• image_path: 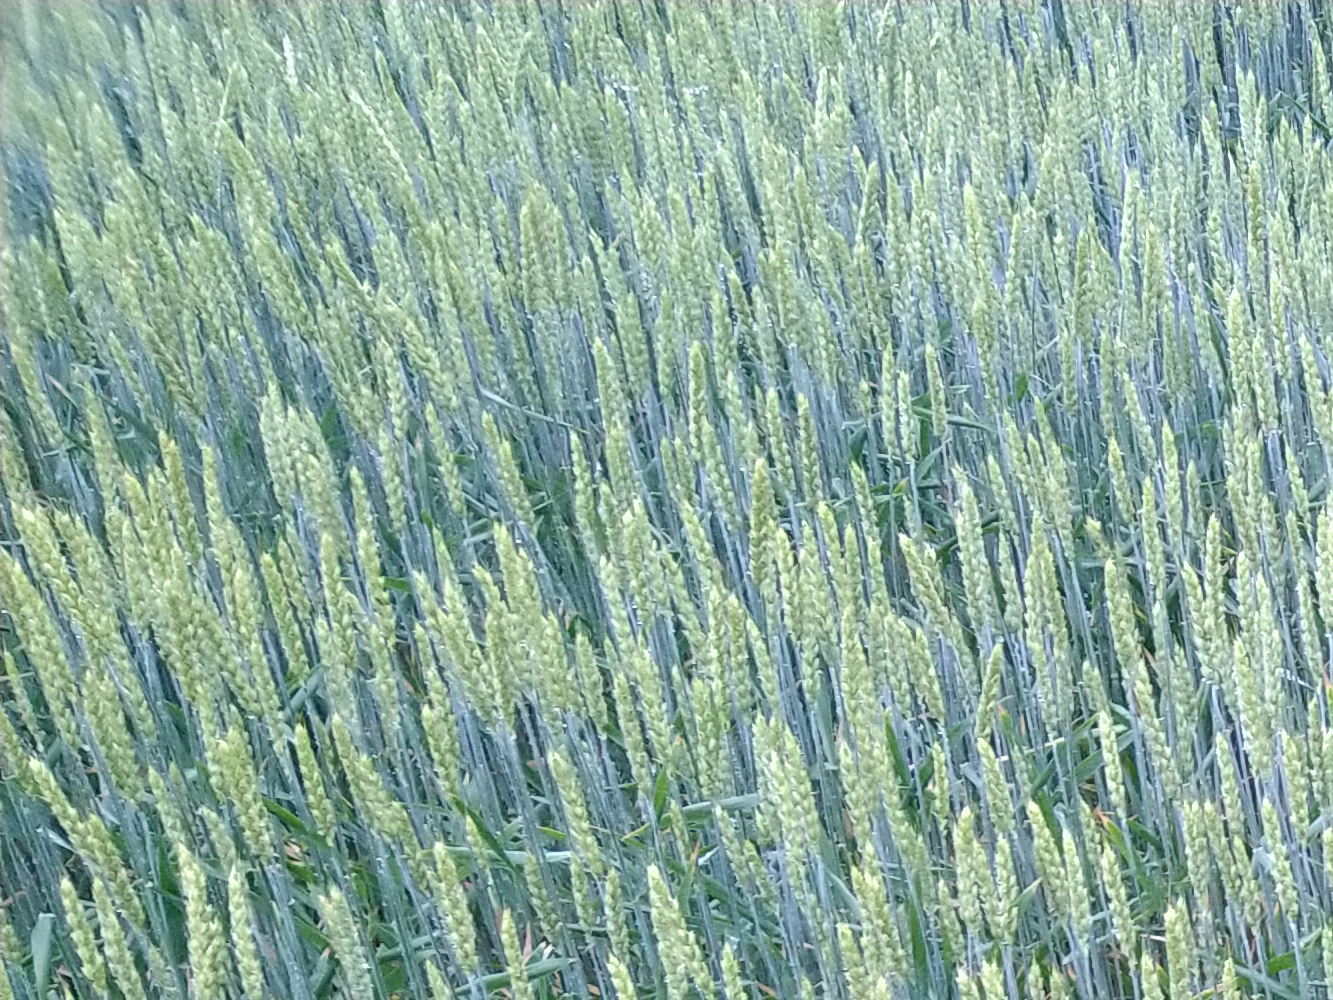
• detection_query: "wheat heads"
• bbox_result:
[264,233,317,333]
[771,8,794,69]
[955,505,975,626]
[592,554,641,674]
[187,239,208,286]
[730,0,745,65]
[851,869,886,973]
[971,299,999,410]
[802,519,841,660]
[289,203,328,280]
[787,97,804,149]
[439,8,461,80]
[224,30,246,79]
[61,879,105,989]
[594,0,606,29]
[473,565,503,614]
[808,8,825,80]
[611,678,650,782]
[323,321,345,377]
[856,160,883,252]
[923,157,955,215]
[295,138,308,175]
[362,281,382,352]
[581,123,603,193]
[940,166,964,237]
[194,594,255,714]
[768,252,786,296]
[694,15,716,94]
[67,214,108,262]
[206,342,235,404]
[1052,652,1076,725]
[202,807,236,873]
[1094,39,1105,102]
[354,67,379,111]
[1184,804,1207,894]
[853,0,872,48]
[761,138,775,174]
[415,64,435,118]
[975,963,1038,1000]
[771,78,784,122]
[348,0,375,54]
[168,442,206,574]
[986,965,1005,1000]
[837,605,885,789]
[203,442,235,557]
[430,527,464,606]
[580,116,622,184]
[1035,195,1046,268]
[787,262,817,306]
[720,943,755,1000]
[755,814,778,871]
[565,23,599,98]
[185,864,211,1000]
[803,135,818,191]
[478,55,513,163]
[1214,650,1245,722]
[1063,101,1080,155]
[426,118,452,184]
[927,107,946,175]
[730,368,759,455]
[300,0,320,48]
[369,342,390,394]
[1028,278,1046,347]
[702,90,726,146]
[686,87,717,161]
[517,545,544,609]
[1235,551,1259,665]
[637,106,670,189]
[678,28,702,99]
[1191,144,1200,208]
[899,0,931,24]
[258,556,310,679]
[971,158,997,184]
[424,161,457,226]
[956,970,984,1000]
[1283,740,1306,835]
[319,899,342,956]
[332,136,370,228]
[756,46,769,107]
[1030,959,1050,1000]
[228,517,262,623]
[0,908,26,965]
[1217,142,1225,213]
[300,30,318,65]
[252,37,302,135]
[951,612,976,707]
[1322,152,1333,198]
[156,20,184,97]
[382,339,408,437]
[259,0,271,17]
[903,71,922,144]
[936,68,971,153]
[921,291,939,355]
[304,85,329,133]
[0,549,31,659]
[405,227,427,290]
[1080,660,1106,708]
[1102,16,1118,79]
[892,29,909,66]
[829,74,848,112]
[675,667,695,749]
[358,753,391,830]
[456,102,475,167]
[743,0,762,80]
[1298,336,1327,432]
[692,228,710,288]
[289,407,308,454]
[539,618,561,707]
[481,414,506,487]
[90,817,147,921]
[1289,135,1308,218]
[1060,832,1092,947]
[592,233,614,293]
[188,124,227,207]
[920,85,936,133]
[745,624,777,697]
[870,7,901,31]
[1299,0,1317,20]
[840,526,869,614]
[1029,804,1069,915]
[54,266,91,357]
[195,683,222,794]
[56,212,113,327]
[73,94,93,149]
[1296,574,1326,680]
[1022,555,1049,664]
[1010,69,1025,178]
[53,75,74,127]
[1184,6,1197,46]
[1062,332,1079,413]
[415,581,454,689]
[1150,167,1173,232]
[252,239,303,373]
[291,447,335,536]
[864,843,901,984]
[639,255,655,322]
[1031,518,1070,653]
[1253,334,1279,423]
[1163,904,1192,1000]
[412,622,444,713]
[278,540,313,627]
[1247,164,1265,259]
[742,114,765,203]
[12,502,48,590]
[955,808,987,932]
[302,177,317,228]
[1106,561,1148,689]
[1119,258,1141,337]
[969,20,990,86]
[1003,0,1028,54]
[93,534,118,602]
[1100,330,1119,441]
[767,180,799,260]
[443,616,496,719]
[1202,800,1244,910]
[429,234,478,399]
[1322,270,1333,323]
[233,63,257,122]
[654,319,676,396]
[1061,47,1070,82]
[774,524,796,628]
[214,533,239,643]
[478,206,499,295]
[988,90,1000,136]
[445,214,462,273]
[2,651,46,744]
[898,371,914,455]
[1077,170,1096,224]
[1098,847,1135,952]
[550,755,592,851]
[44,145,72,209]
[1273,137,1289,192]
[562,83,588,123]
[35,106,60,149]
[1246,443,1266,534]
[372,626,398,714]
[622,165,649,254]
[181,297,213,395]
[658,557,704,647]
[1269,6,1287,41]
[267,377,293,466]
[674,439,694,500]
[664,34,687,93]
[1043,224,1063,320]
[1284,444,1309,528]
[1214,140,1222,181]
[524,0,550,76]
[814,69,830,150]
[673,799,686,866]
[167,582,197,698]
[880,0,893,52]
[921,0,941,38]
[905,16,934,87]
[1233,635,1273,772]
[363,54,385,99]
[367,128,400,206]
[0,700,35,795]
[0,167,15,233]
[840,742,877,873]
[821,1,836,60]
[349,465,374,537]
[1078,63,1095,94]
[896,613,944,717]
[1170,642,1205,738]
[1116,23,1136,93]
[1256,97,1275,171]
[766,581,783,653]
[1144,957,1171,1000]
[362,102,412,183]
[55,510,107,637]
[666,261,687,327]
[1287,225,1294,259]
[427,225,448,271]
[341,306,362,393]
[945,137,958,208]
[93,674,147,794]
[190,56,212,143]
[712,149,755,240]
[1179,289,1196,317]
[777,0,794,52]
[332,713,363,821]
[1274,232,1308,325]
[1317,46,1333,136]
[577,633,606,725]
[964,183,989,287]
[887,613,911,719]
[321,126,341,188]
[307,412,333,480]
[306,280,327,322]
[619,0,642,46]
[626,290,652,379]
[976,644,1003,738]
[991,836,1019,935]
[738,847,785,905]
[1035,400,1061,475]
[429,94,451,179]
[73,509,106,591]
[1107,119,1122,176]
[342,66,361,101]
[692,681,716,798]
[385,0,415,57]
[703,423,744,527]
[346,385,371,441]
[885,238,916,330]
[911,210,932,284]
[35,505,60,555]
[1262,800,1296,928]
[460,205,484,282]
[659,436,677,492]
[687,342,706,461]
[1247,247,1274,323]
[1163,421,1181,553]
[984,1,1001,43]
[1220,422,1233,485]
[1233,834,1261,923]
[608,244,625,285]
[67,0,96,54]
[125,475,158,551]
[493,19,506,59]
[1202,516,1225,656]
[1177,0,1187,29]
[834,231,871,339]
[722,109,739,174]
[1024,433,1055,522]
[993,45,1010,108]
[676,498,720,571]
[1123,590,1134,639]
[75,620,110,679]
[1004,214,1022,313]
[1227,174,1249,254]
[68,77,86,111]
[1179,321,1194,382]
[1261,498,1287,592]
[792,168,821,270]
[1083,334,1099,417]
[1132,679,1177,796]
[220,743,269,857]
[1270,277,1288,378]
[1246,0,1261,56]
[615,306,637,389]
[421,401,466,514]
[235,192,257,287]
[374,440,409,527]
[940,0,960,37]
[1170,187,1186,278]
[859,249,891,349]
[334,323,362,394]
[925,345,944,435]
[26,510,103,640]
[316,619,349,722]
[764,721,811,866]
[1078,797,1102,866]
[367,190,393,250]
[777,267,806,350]
[94,106,114,199]
[230,0,262,76]
[816,255,856,369]
[605,87,636,183]
[731,275,758,360]
[931,740,947,817]
[156,429,188,548]
[326,876,377,1000]
[252,631,287,758]
[1052,969,1080,1000]
[349,311,369,381]
[598,481,627,584]
[106,237,144,320]
[573,6,587,38]
[652,868,710,992]
[425,961,468,1000]
[1009,310,1034,374]
[1213,280,1230,323]
[393,97,429,175]
[1116,0,1126,24]
[608,435,619,502]
[1171,24,1186,109]
[987,455,1022,535]
[377,49,397,101]
[669,189,693,282]
[315,263,337,306]
[573,268,599,339]
[253,125,295,206]
[756,93,770,128]
[1280,113,1293,150]
[896,534,948,633]
[1147,82,1174,164]
[833,0,856,48]
[528,62,563,168]
[1183,565,1216,684]
[971,0,982,34]
[1205,211,1232,286]
[702,167,724,261]
[801,565,816,702]
[390,802,429,887]
[228,728,267,826]
[1159,0,1176,56]
[879,349,898,458]
[1070,0,1093,63]
[939,882,961,950]
[798,393,825,512]
[1025,209,1040,252]
[603,0,619,34]
[1287,510,1307,574]
[190,217,229,283]
[1310,204,1323,260]
[1196,0,1211,55]
[645,193,668,257]
[105,115,131,172]
[527,648,562,734]
[1320,428,1333,492]
[744,423,759,480]
[873,729,921,874]
[1324,729,1333,814]
[468,815,487,880]
[1224,20,1241,64]
[1194,290,1224,388]
[775,142,793,182]
[1002,421,1040,514]
[1228,291,1251,397]
[1326,337,1333,411]
[493,198,525,304]
[1135,188,1150,262]
[102,10,123,56]
[296,722,332,833]
[94,25,121,79]
[720,606,732,714]
[211,33,231,81]
[282,10,314,62]
[770,115,789,151]
[625,523,646,620]
[1135,52,1146,105]
[104,200,133,233]
[912,169,927,218]
[594,24,623,75]
[243,0,262,40]
[1164,165,1183,197]
[31,237,61,331]
[501,306,541,413]
[227,316,263,393]
[942,37,976,125]
[117,208,146,268]
[1230,476,1256,559]
[1180,135,1189,183]
[716,10,740,85]
[1189,206,1206,235]
[493,518,525,614]
[518,208,558,329]
[103,506,129,575]
[389,230,415,294]
[1302,114,1313,172]
[585,3,596,62]
[448,129,462,169]
[445,263,472,347]
[130,253,177,347]
[1295,207,1308,243]
[500,611,533,695]
[170,26,192,85]
[335,13,356,53]
[440,74,466,113]
[1030,653,1057,729]
[1321,828,1333,950]
[748,461,766,595]
[1104,0,1121,19]
[240,305,279,387]
[469,300,504,396]
[858,376,877,418]
[398,0,424,43]
[989,132,1009,195]
[1049,43,1064,84]
[976,739,1013,831]
[839,65,857,108]
[200,0,222,38]
[502,0,525,47]
[1218,733,1248,841]
[335,184,362,253]
[119,90,148,146]
[1102,246,1127,327]
[160,187,187,233]
[55,121,95,220]
[1178,899,1200,983]
[1302,229,1321,322]
[765,390,794,486]
[570,432,600,565]
[149,590,178,675]
[1320,193,1327,227]
[1186,458,1207,548]
[1086,520,1111,559]
[1173,721,1191,772]
[1106,78,1127,129]
[903,496,915,546]
[137,324,204,423]
[791,0,812,67]
[887,166,910,247]
[832,108,845,148]
[192,590,216,669]
[969,152,985,190]
[863,52,877,127]
[851,463,879,549]
[698,15,739,113]
[851,147,882,229]
[1041,109,1060,147]
[1203,34,1220,84]
[266,102,301,175]
[558,217,579,282]
[1054,174,1075,239]
[328,72,351,136]
[344,593,371,639]
[174,238,222,339]
[565,186,591,263]
[1257,588,1287,726]
[0,248,27,340]
[784,72,820,150]
[763,468,780,513]
[979,106,992,138]
[532,188,562,304]
[43,222,59,274]
[282,35,296,79]
[652,890,680,994]
[1125,373,1155,460]
[603,866,628,963]
[15,251,53,330]
[994,538,1024,631]
[79,673,116,792]
[450,597,502,711]
[1260,0,1270,38]
[705,582,722,711]
[1140,478,1168,601]
[15,562,78,692]
[547,88,574,170]
[1028,29,1052,105]
[828,142,842,186]
[741,69,759,121]
[119,173,186,288]
[763,0,777,60]
[657,286,677,329]
[714,278,736,398]
[223,122,281,216]
[1018,0,1034,37]
[161,102,190,159]
[647,30,667,115]
[1316,513,1329,627]
[458,165,482,222]
[875,65,898,160]
[752,288,777,376]
[523,857,553,942]
[994,191,1019,237]
[121,23,151,109]
[420,707,460,804]
[372,245,390,300]
[322,0,344,71]
[1163,300,1174,388]
[1300,136,1326,231]
[756,252,785,338]
[810,291,840,378]
[1075,226,1090,341]
[151,477,173,570]
[1203,116,1218,184]
[427,27,450,86]
[1098,704,1126,816]
[970,89,986,122]
[361,384,381,421]
[990,71,1003,133]
[192,39,223,120]
[952,235,969,329]
[0,570,79,734]
[386,136,424,226]
[868,542,886,620]
[603,185,634,255]
[1106,439,1135,525]
[570,860,594,932]
[590,341,643,491]
[1161,245,1174,314]
[584,257,606,336]
[1222,959,1251,1000]
[679,125,701,224]
[184,0,211,63]
[500,912,533,1000]
[1275,190,1291,235]
[285,521,316,597]
[1115,338,1134,391]
[107,622,157,741]
[586,89,608,125]
[817,145,829,182]
[265,17,284,54]
[1015,746,1030,806]
[107,333,160,427]
[1267,220,1282,288]
[790,34,810,95]
[1146,244,1159,326]
[1089,222,1114,332]
[137,6,173,108]
[454,15,481,76]
[1142,0,1159,64]
[1129,0,1140,28]
[435,846,476,966]
[406,299,428,345]
[1034,148,1057,212]
[1235,66,1258,160]
[955,27,978,94]
[841,114,856,168]
[90,880,151,1000]
[215,228,247,296]
[0,409,42,517]
[1054,84,1071,124]
[1246,70,1257,119]
[761,180,776,257]
[685,284,709,341]
[970,845,1010,935]
[122,520,158,630]
[259,401,292,507]
[500,439,539,536]
[224,863,264,1000]
[1320,927,1333,1000]
[363,532,393,646]
[378,292,419,347]
[242,119,269,187]
[380,236,397,289]
[1192,0,1206,35]
[469,75,495,153]
[139,105,166,155]
[492,0,499,31]
[232,171,259,252]
[782,721,823,857]
[851,46,868,117]
[268,0,285,15]
[1124,95,1148,143]
[296,102,323,172]
[1141,244,1150,304]
[531,311,555,392]
[1002,133,1014,172]
[1235,142,1247,184]
[1021,59,1044,146]
[1053,448,1074,562]
[1073,84,1091,127]
[509,30,535,120]
[1321,0,1333,38]
[837,924,871,1000]
[1306,692,1329,805]
[1021,190,1034,217]
[608,956,662,1000]
[319,537,353,678]
[930,215,952,305]
[27,759,106,876]
[972,174,999,250]
[478,29,513,113]
[148,767,198,888]
[414,237,433,304]
[980,260,1008,365]
[633,499,673,609]
[712,809,753,903]
[818,501,849,607]
[899,134,915,175]
[1309,159,1321,211]
[84,385,131,511]
[0,961,37,1000]
[217,0,231,32]
[785,854,833,940]
[329,248,397,340]
[729,604,754,706]
[714,719,736,804]
[154,470,166,510]
[372,92,397,151]
[170,766,214,858]
[886,59,905,117]
[615,39,648,111]
[402,321,454,406]
[9,348,68,445]
[925,545,943,604]
[1052,232,1077,316]
[750,710,770,814]
[558,648,584,712]
[634,657,677,763]
[348,104,366,179]
[964,482,1002,639]
[1186,264,1202,317]
[1067,154,1083,218]
[1120,172,1141,262]
[1233,406,1247,493]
